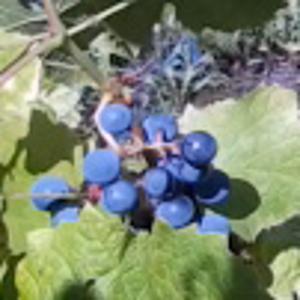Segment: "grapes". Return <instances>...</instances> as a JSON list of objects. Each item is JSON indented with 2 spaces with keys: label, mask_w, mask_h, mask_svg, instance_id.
Wrapping results in <instances>:
<instances>
[{
  "label": "grapes",
  "mask_w": 300,
  "mask_h": 300,
  "mask_svg": "<svg viewBox=\"0 0 300 300\" xmlns=\"http://www.w3.org/2000/svg\"><path fill=\"white\" fill-rule=\"evenodd\" d=\"M103 121L117 145L114 150H87L83 170L87 182L102 188L107 213L133 214L146 199L149 208L177 231L193 225L202 236H230L232 225L226 217L200 212V207L225 203L232 193L231 175L214 162L219 141L213 133L195 130L179 140L180 123L165 110L145 114L141 127L131 129L134 112L119 102L108 103Z\"/></svg>",
  "instance_id": "grapes-1"
},
{
  "label": "grapes",
  "mask_w": 300,
  "mask_h": 300,
  "mask_svg": "<svg viewBox=\"0 0 300 300\" xmlns=\"http://www.w3.org/2000/svg\"><path fill=\"white\" fill-rule=\"evenodd\" d=\"M71 196V186L56 176H46L31 188L34 207L50 214L49 224L53 228L60 227L62 223H76L82 216V206L68 202Z\"/></svg>",
  "instance_id": "grapes-2"
}]
</instances>
